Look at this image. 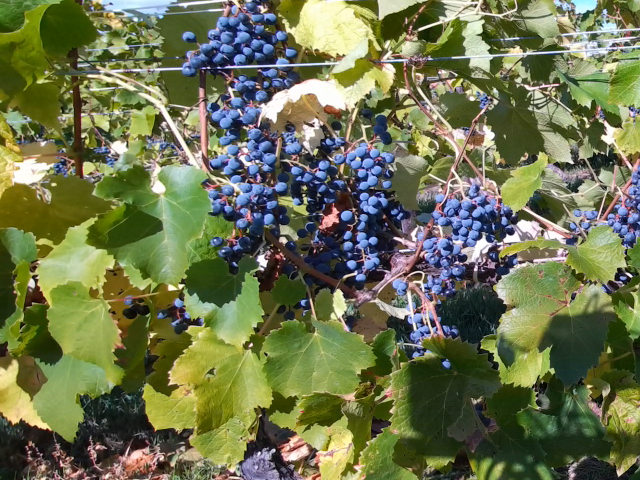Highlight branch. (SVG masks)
Instances as JSON below:
<instances>
[{"mask_svg":"<svg viewBox=\"0 0 640 480\" xmlns=\"http://www.w3.org/2000/svg\"><path fill=\"white\" fill-rule=\"evenodd\" d=\"M80 79H99V80H102V81L113 83L115 85H120L121 87H125L126 89L130 90L131 92H134V93L144 97L145 99H148L150 102L154 103L156 106L159 107L160 111L165 116V120H166L167 125L171 128L172 132L176 135V139L179 141V143L185 149V152H186L187 156L189 157L190 161L194 164L196 169L200 168V164L197 161V159L194 157L192 149L187 144L186 139L181 134V132L177 129V127L172 123L171 117H170V113L167 111V109L164 107V105L159 100H157L156 98L152 97L150 94H147L146 92H144V91H142V90H140V89H138L136 87H133L132 85L128 84L127 82H123L122 80H117L115 78L104 76L102 74H77V75H73L71 77V80L73 81V106H74L73 122H74V128H75V131L73 132V141H74V143H73V154L75 155V171H76V175H77V177L79 179H82L84 177L83 170H82L83 142L81 141V135H82V124H83V121H82V109H81V104H80L81 103Z\"/></svg>","mask_w":640,"mask_h":480,"instance_id":"30e6481e","label":"branch"},{"mask_svg":"<svg viewBox=\"0 0 640 480\" xmlns=\"http://www.w3.org/2000/svg\"><path fill=\"white\" fill-rule=\"evenodd\" d=\"M402 69H403V74H404V84H405L406 88L409 91L410 98L420 107V109L422 110L424 115L434 124V127L437 128L439 131H441V133L450 141V144L452 145V147L458 151L455 160L453 161V163L451 164V166L449 168V173H448L447 178L445 180V183H444V185L442 187V192L443 193L447 192V189L449 188L451 180H452V178L454 176V170L458 166V164H459V162H460L462 157H463V160H464L465 164L468 166V168L478 178V181L483 186L487 187L490 191H494L495 187L490 182L486 181L483 178V175L477 170L476 167H474L473 163L469 160V157L465 152V149L467 148V145H468L469 140L471 138V134H472L475 122L480 118L482 113L490 106V103L486 102L482 107H480L477 110L475 115L471 118V120L469 122V126H468V129H467V132H466V135L464 137V141H463L462 145L459 146L455 142V139L452 137V135L449 132L446 131V128L438 123V120L435 117H433L432 114L429 113V111L427 110L426 106L414 94L413 86L409 82V72H408V66H407L406 62L402 63Z\"/></svg>","mask_w":640,"mask_h":480,"instance_id":"325d2c04","label":"branch"},{"mask_svg":"<svg viewBox=\"0 0 640 480\" xmlns=\"http://www.w3.org/2000/svg\"><path fill=\"white\" fill-rule=\"evenodd\" d=\"M263 236L271 241L277 248L278 250L283 253L284 255H286V257L299 269H301L304 273H309L310 275L316 276L318 279H321L322 281H325L333 286H335L336 288H338L339 290H342L356 298H361V299H371L373 297V295L376 293V291L379 290V288L383 285H385L391 278H393L395 276L396 273L400 272V268H394L393 272L388 274L382 281H379L378 283L375 284V286L369 291V293L367 294L364 291H359L356 290L340 281H338L337 279L319 271L316 268H312L311 266H307L304 262L300 261L295 255H293V253L284 246V244L277 239L273 234L270 233V231L268 229H265L263 231Z\"/></svg>","mask_w":640,"mask_h":480,"instance_id":"170604dd","label":"branch"},{"mask_svg":"<svg viewBox=\"0 0 640 480\" xmlns=\"http://www.w3.org/2000/svg\"><path fill=\"white\" fill-rule=\"evenodd\" d=\"M198 90H199V113H200V122H201V138H200V146L202 150L201 156V169L204 172L209 170V135H208V120H207V102H206V88H207V78L206 72H199V82H198Z\"/></svg>","mask_w":640,"mask_h":480,"instance_id":"45aa463d","label":"branch"},{"mask_svg":"<svg viewBox=\"0 0 640 480\" xmlns=\"http://www.w3.org/2000/svg\"><path fill=\"white\" fill-rule=\"evenodd\" d=\"M433 223H434V219H433V218H430V219L428 220V222L426 223L425 228H424V232H423V236H422V237L420 238V240L418 241V243H417V247L415 248V250H414V251H413V253H412L411 260H410V262L408 263L407 268L405 269V272H406V273H407V272L409 271V269L413 266V264H414V262H415V260H416V256H417V255H418V253L421 251V249H422V246H423L424 242L428 239L429 231H430V228H431V226H432V224H433Z\"/></svg>","mask_w":640,"mask_h":480,"instance_id":"982ccf7c","label":"branch"},{"mask_svg":"<svg viewBox=\"0 0 640 480\" xmlns=\"http://www.w3.org/2000/svg\"><path fill=\"white\" fill-rule=\"evenodd\" d=\"M77 54H78V50L76 48H73L69 55L70 65H68L66 62L61 60L59 57H56L54 59V62L64 71L70 73L71 70L79 68V64L77 63Z\"/></svg>","mask_w":640,"mask_h":480,"instance_id":"1ff4a987","label":"branch"},{"mask_svg":"<svg viewBox=\"0 0 640 480\" xmlns=\"http://www.w3.org/2000/svg\"><path fill=\"white\" fill-rule=\"evenodd\" d=\"M430 5H431V1L427 0L426 3L421 7V9L415 15V17L411 20V22H410V24L408 25V28H407V37L408 38L412 37L413 27L416 25L417 21L421 18V16L424 14V12L428 9V7Z\"/></svg>","mask_w":640,"mask_h":480,"instance_id":"ea751061","label":"branch"},{"mask_svg":"<svg viewBox=\"0 0 640 480\" xmlns=\"http://www.w3.org/2000/svg\"><path fill=\"white\" fill-rule=\"evenodd\" d=\"M536 221H537V222H539V223H541V224H543V225H546L550 231H552V232H554V233L558 234L559 236H561V237H563V238H566V239H568V240H572V239H573V236H572V235H570L569 233H566V232H564V231H561V230H560V229H558L557 227H554V226L552 225V223H551L550 221H548V220H545V219H543V218H541V217H537V218H536Z\"/></svg>","mask_w":640,"mask_h":480,"instance_id":"ca6c30ca","label":"branch"},{"mask_svg":"<svg viewBox=\"0 0 640 480\" xmlns=\"http://www.w3.org/2000/svg\"><path fill=\"white\" fill-rule=\"evenodd\" d=\"M621 198V194L617 193L608 203L606 210L600 216L601 221H605L609 213L611 212L614 204Z\"/></svg>","mask_w":640,"mask_h":480,"instance_id":"1d269e1b","label":"branch"}]
</instances>
